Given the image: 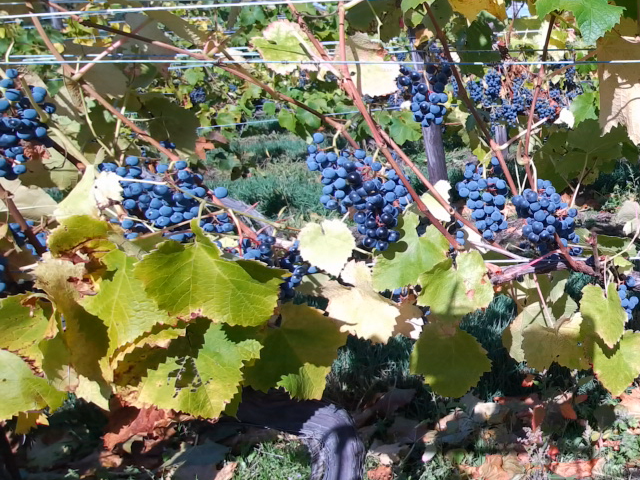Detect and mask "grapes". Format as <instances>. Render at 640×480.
<instances>
[{"label": "grapes", "instance_id": "1", "mask_svg": "<svg viewBox=\"0 0 640 480\" xmlns=\"http://www.w3.org/2000/svg\"><path fill=\"white\" fill-rule=\"evenodd\" d=\"M309 155L306 164L310 171L321 172L322 188L320 203L327 210H336L345 214L348 207H354V221L358 232L364 235L362 245L385 251L390 243L398 242L401 233L391 230L398 225V215L407 210L413 201L410 192L403 184L395 169L385 170L386 182L379 177L365 181L362 172L366 167L372 171H381L383 164L366 157L364 148L353 151L355 159H350L351 151L342 149L339 155L335 151H319L316 145L307 147Z\"/></svg>", "mask_w": 640, "mask_h": 480}, {"label": "grapes", "instance_id": "2", "mask_svg": "<svg viewBox=\"0 0 640 480\" xmlns=\"http://www.w3.org/2000/svg\"><path fill=\"white\" fill-rule=\"evenodd\" d=\"M187 167L188 163L184 160L175 162L174 169L177 172L174 174V182L179 189L196 197H204L205 188L200 185L203 181L202 174L189 173ZM119 184L124 188L122 196L126 198L123 208L134 210L137 206L145 217L159 228H165L170 223L178 224L194 219L199 213L200 202L196 198L188 193L172 192L167 185L124 180H120Z\"/></svg>", "mask_w": 640, "mask_h": 480}, {"label": "grapes", "instance_id": "3", "mask_svg": "<svg viewBox=\"0 0 640 480\" xmlns=\"http://www.w3.org/2000/svg\"><path fill=\"white\" fill-rule=\"evenodd\" d=\"M536 186L543 191L541 195L532 188H527L522 194H515L509 198L516 210V216L527 221L528 225L523 227V235L536 244L540 251L546 248L548 239H556L555 232L560 236L559 241L564 248L568 247L567 239L578 244L581 236L573 230L578 210L571 208L566 212V217H555L553 213L557 209H566L568 203H561V194L557 193V188L551 181L538 179Z\"/></svg>", "mask_w": 640, "mask_h": 480}, {"label": "grapes", "instance_id": "4", "mask_svg": "<svg viewBox=\"0 0 640 480\" xmlns=\"http://www.w3.org/2000/svg\"><path fill=\"white\" fill-rule=\"evenodd\" d=\"M5 75L10 79H0V88L4 91V98H0V114L10 109V102H16L14 108L18 110L16 117H0V177L16 180L27 173L25 165H14L4 158L14 159L26 163L28 157L23 151L20 139L32 140L42 138L47 134L48 127L38 120L37 110L30 108L29 99L21 90L15 89L14 81L18 77L16 68H8Z\"/></svg>", "mask_w": 640, "mask_h": 480}, {"label": "grapes", "instance_id": "5", "mask_svg": "<svg viewBox=\"0 0 640 480\" xmlns=\"http://www.w3.org/2000/svg\"><path fill=\"white\" fill-rule=\"evenodd\" d=\"M463 179L454 184L458 196L466 199V205L473 209L471 218L476 220L475 227L483 232L486 240H492L494 231L506 230L508 221L500 212L504 208L509 187L504 179L498 177H482V167L473 162L464 164Z\"/></svg>", "mask_w": 640, "mask_h": 480}, {"label": "grapes", "instance_id": "6", "mask_svg": "<svg viewBox=\"0 0 640 480\" xmlns=\"http://www.w3.org/2000/svg\"><path fill=\"white\" fill-rule=\"evenodd\" d=\"M399 71L404 74L400 77L399 85L410 87L411 103L409 109L412 111L413 120L420 122L424 128H429L431 123L441 125L447 109L439 104H445L448 101V95L443 91L444 85L448 83V77L451 75L450 68L444 66L436 76L434 74L436 67L434 65L427 67L428 81L433 84L434 91L428 90V85L422 82L420 71L413 70L410 66H399Z\"/></svg>", "mask_w": 640, "mask_h": 480}, {"label": "grapes", "instance_id": "7", "mask_svg": "<svg viewBox=\"0 0 640 480\" xmlns=\"http://www.w3.org/2000/svg\"><path fill=\"white\" fill-rule=\"evenodd\" d=\"M299 245L300 241L296 240L292 244V247L288 248L289 252L285 253L281 257L280 265L283 269H287L291 272V275L286 276L283 281V287L286 289L299 287L300 282L303 280L305 275L318 272V268L316 266H309L308 263L303 262V257L298 248Z\"/></svg>", "mask_w": 640, "mask_h": 480}, {"label": "grapes", "instance_id": "8", "mask_svg": "<svg viewBox=\"0 0 640 480\" xmlns=\"http://www.w3.org/2000/svg\"><path fill=\"white\" fill-rule=\"evenodd\" d=\"M257 242L260 243V245L253 247L249 238H243L241 243V253L237 248L232 249L231 253L239 259H256L272 265L269 257L273 256L272 246L276 244V239L265 233H259L257 235Z\"/></svg>", "mask_w": 640, "mask_h": 480}, {"label": "grapes", "instance_id": "9", "mask_svg": "<svg viewBox=\"0 0 640 480\" xmlns=\"http://www.w3.org/2000/svg\"><path fill=\"white\" fill-rule=\"evenodd\" d=\"M139 164L140 159L135 155H130L125 158V165L130 166L127 169L124 166H118L114 162H103L98 164L97 170L99 173H103L104 171L114 172L124 179H135L142 174V169Z\"/></svg>", "mask_w": 640, "mask_h": 480}, {"label": "grapes", "instance_id": "10", "mask_svg": "<svg viewBox=\"0 0 640 480\" xmlns=\"http://www.w3.org/2000/svg\"><path fill=\"white\" fill-rule=\"evenodd\" d=\"M219 223L213 224V218H202L199 221V226L203 228L204 232H214V233H227L233 231L235 229V224L231 222L228 213H218L216 215Z\"/></svg>", "mask_w": 640, "mask_h": 480}, {"label": "grapes", "instance_id": "11", "mask_svg": "<svg viewBox=\"0 0 640 480\" xmlns=\"http://www.w3.org/2000/svg\"><path fill=\"white\" fill-rule=\"evenodd\" d=\"M625 283L626 284L619 286V299L621 300V307L627 313V319L633 320V309L639 304V298L637 296H631L628 299L626 291L628 287H634L636 285V280L633 277H627Z\"/></svg>", "mask_w": 640, "mask_h": 480}, {"label": "grapes", "instance_id": "12", "mask_svg": "<svg viewBox=\"0 0 640 480\" xmlns=\"http://www.w3.org/2000/svg\"><path fill=\"white\" fill-rule=\"evenodd\" d=\"M109 222L111 224H116V225L120 226L121 228L133 229L134 232H132V233H128V232L124 233V238L125 239H135V238L138 237V233H148L149 232V228L144 223H134V221L130 220V219L118 220L117 218H110Z\"/></svg>", "mask_w": 640, "mask_h": 480}, {"label": "grapes", "instance_id": "13", "mask_svg": "<svg viewBox=\"0 0 640 480\" xmlns=\"http://www.w3.org/2000/svg\"><path fill=\"white\" fill-rule=\"evenodd\" d=\"M28 90L30 91V96L36 103L43 102L48 95V90L44 87L30 85Z\"/></svg>", "mask_w": 640, "mask_h": 480}, {"label": "grapes", "instance_id": "14", "mask_svg": "<svg viewBox=\"0 0 640 480\" xmlns=\"http://www.w3.org/2000/svg\"><path fill=\"white\" fill-rule=\"evenodd\" d=\"M9 229L13 232V236L17 241H23L26 238L23 230L17 222H11L9 224Z\"/></svg>", "mask_w": 640, "mask_h": 480}, {"label": "grapes", "instance_id": "15", "mask_svg": "<svg viewBox=\"0 0 640 480\" xmlns=\"http://www.w3.org/2000/svg\"><path fill=\"white\" fill-rule=\"evenodd\" d=\"M186 238H192L194 237V233H184V232H180V233H175L172 235H168V239H173V241H184V239Z\"/></svg>", "mask_w": 640, "mask_h": 480}, {"label": "grapes", "instance_id": "16", "mask_svg": "<svg viewBox=\"0 0 640 480\" xmlns=\"http://www.w3.org/2000/svg\"><path fill=\"white\" fill-rule=\"evenodd\" d=\"M38 241L42 244V246L48 251L50 246L47 244V234L45 232H39L34 234Z\"/></svg>", "mask_w": 640, "mask_h": 480}]
</instances>
